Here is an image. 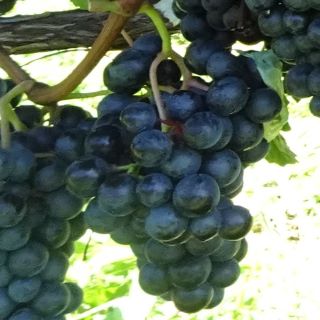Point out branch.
<instances>
[{
    "label": "branch",
    "instance_id": "obj_1",
    "mask_svg": "<svg viewBox=\"0 0 320 320\" xmlns=\"http://www.w3.org/2000/svg\"><path fill=\"white\" fill-rule=\"evenodd\" d=\"M145 0H117L107 23L87 57L61 83L50 87L37 82L34 87L24 91L31 101L41 105H52L71 94L119 37L124 24L130 16L136 14Z\"/></svg>",
    "mask_w": 320,
    "mask_h": 320
},
{
    "label": "branch",
    "instance_id": "obj_2",
    "mask_svg": "<svg viewBox=\"0 0 320 320\" xmlns=\"http://www.w3.org/2000/svg\"><path fill=\"white\" fill-rule=\"evenodd\" d=\"M0 68L6 70L9 76L16 81L17 84L25 80H34L26 73L8 54L0 50Z\"/></svg>",
    "mask_w": 320,
    "mask_h": 320
}]
</instances>
